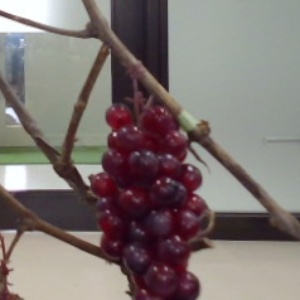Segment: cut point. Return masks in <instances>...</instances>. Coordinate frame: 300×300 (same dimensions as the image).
I'll use <instances>...</instances> for the list:
<instances>
[{"mask_svg": "<svg viewBox=\"0 0 300 300\" xmlns=\"http://www.w3.org/2000/svg\"><path fill=\"white\" fill-rule=\"evenodd\" d=\"M132 80L134 81L135 99L126 97V101H129L132 104H134L136 119L139 120L140 106H144L147 109H150L151 104L153 102V95H149L147 101H146V99H143L141 97V92L137 89V78L135 77V73H132Z\"/></svg>", "mask_w": 300, "mask_h": 300, "instance_id": "cut-point-1", "label": "cut point"}]
</instances>
